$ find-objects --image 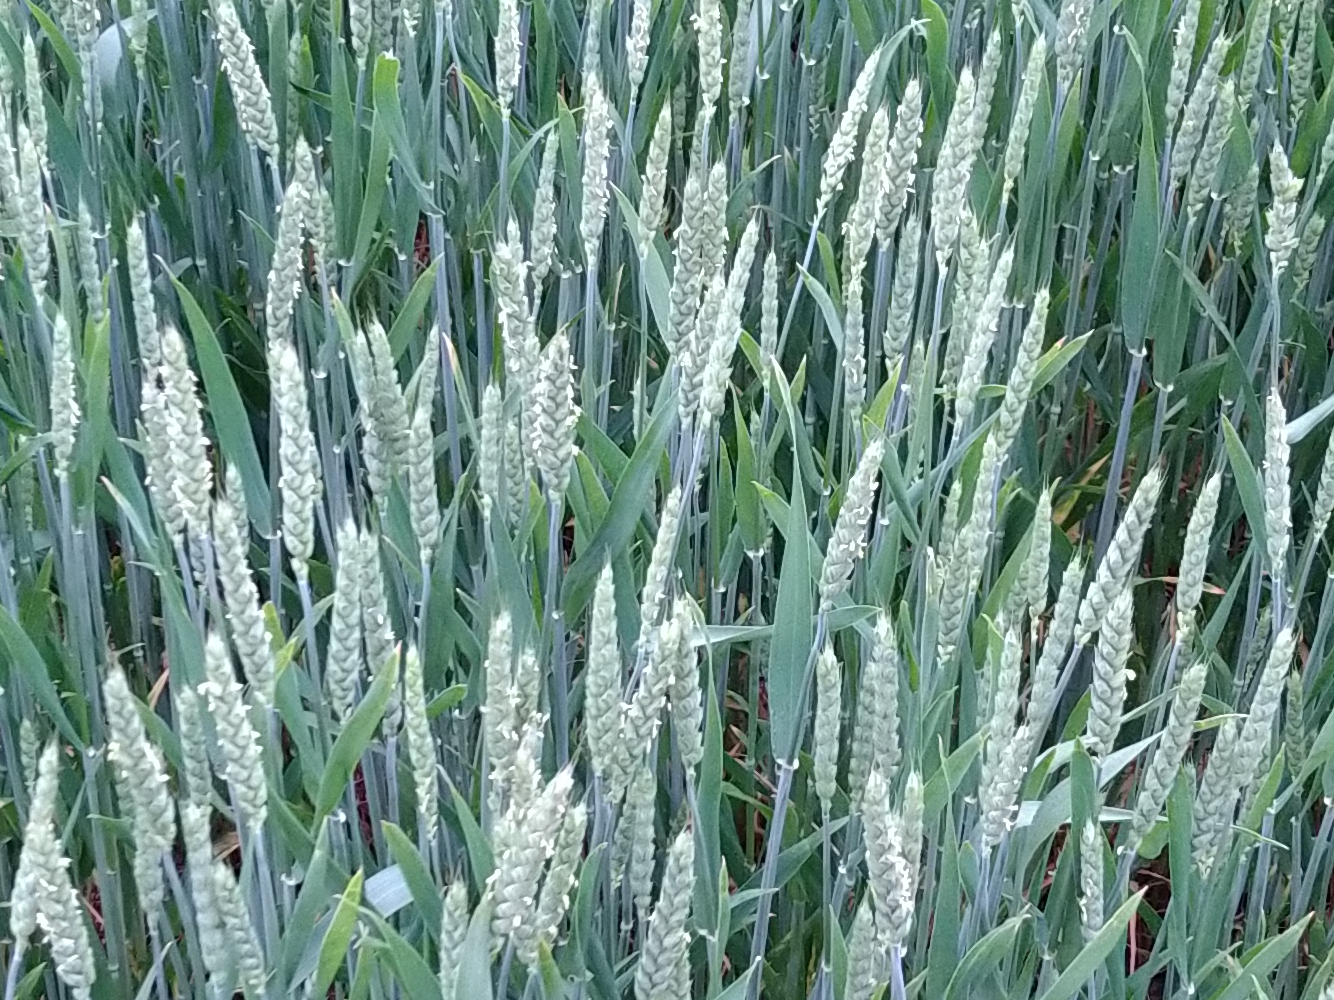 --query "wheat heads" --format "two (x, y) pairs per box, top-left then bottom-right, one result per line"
(1164, 0), (1204, 130)
(628, 0), (658, 87)
(286, 34), (300, 171)
(844, 280), (865, 420)
(968, 436), (999, 588)
(631, 770), (657, 907)
(1318, 41), (1334, 179)
(591, 749), (655, 801)
(961, 242), (992, 352)
(849, 111), (891, 262)
(1274, 0), (1303, 52)
(1292, 215), (1325, 296)
(18, 437), (35, 529)
(210, 0), (279, 163)
(819, 443), (884, 610)
(226, 465), (250, 555)
(543, 808), (589, 938)
(485, 613), (514, 779)
(1169, 40), (1229, 177)
(937, 530), (971, 660)
(1235, 749), (1288, 811)
(969, 32), (1003, 157)
(819, 50), (881, 200)
(956, 250), (1015, 409)
(982, 628), (1022, 794)
(729, 0), (754, 116)
(0, 75), (20, 211)
(327, 525), (362, 718)
(1285, 671), (1305, 779)
(24, 35), (49, 158)
(698, 0), (722, 104)
(997, 290), (1052, 456)
(111, 754), (136, 860)
(135, 800), (177, 910)
(847, 750), (899, 812)
(358, 406), (390, 511)
(1239, 0), (1275, 103)
(441, 883), (470, 1000)
(703, 164), (730, 286)
(1248, 610), (1272, 687)
(902, 775), (925, 889)
(178, 803), (226, 971)
(212, 863), (266, 990)
(493, 222), (538, 390)
(580, 77), (610, 255)
(294, 135), (322, 239)
(1081, 820), (1104, 943)
(20, 719), (39, 793)
(875, 625), (901, 786)
(815, 650), (841, 800)
(608, 775), (641, 889)
(1003, 37), (1048, 192)
(1265, 390), (1292, 564)
(1187, 82), (1236, 212)
(846, 903), (877, 1000)
(359, 533), (393, 678)
(841, 204), (856, 319)
(1072, 474), (1163, 640)
(639, 488), (684, 652)
(131, 0), (147, 72)
(480, 387), (502, 508)
(510, 722), (546, 820)
(1175, 475), (1223, 636)
(977, 616), (1004, 735)
(213, 501), (277, 705)
(372, 0), (392, 61)
(420, 328), (439, 420)
(318, 188), (338, 285)
(999, 559), (1031, 630)
(1233, 629), (1297, 787)
(635, 832), (696, 1000)
(140, 381), (182, 537)
(126, 224), (161, 373)
(849, 663), (878, 809)
(678, 282), (725, 418)
(13, 742), (72, 941)
(162, 330), (213, 532)
(877, 80), (924, 237)
(79, 51), (98, 133)
(663, 939), (693, 1000)
(941, 287), (969, 399)
(538, 336), (576, 495)
(932, 165), (972, 249)
(637, 103), (671, 247)
(30, 826), (96, 994)
(492, 818), (543, 964)
(814, 749), (841, 811)
(980, 749), (1049, 847)
(1029, 493), (1052, 614)
(1075, 0), (1107, 68)
(18, 126), (50, 290)
(1123, 667), (1209, 851)
(608, 624), (681, 795)
(347, 0), (371, 62)
(267, 186), (305, 346)
(847, 977), (882, 1000)
(884, 218), (922, 359)
(103, 672), (178, 846)
(864, 773), (914, 965)
(1190, 719), (1238, 874)
(1089, 592), (1135, 754)
(1267, 143), (1301, 268)
(517, 651), (542, 723)
(315, 0), (334, 28)
(674, 613), (702, 766)
(1288, 0), (1319, 119)
(368, 322), (411, 468)
(935, 70), (972, 192)
(1226, 165), (1259, 247)
(63, 0), (99, 48)
(762, 250), (779, 381)
(203, 635), (268, 822)
(582, 0), (605, 94)
(51, 315), (75, 468)
(77, 200), (102, 313)
(408, 411), (434, 549)
(938, 480), (962, 565)
(177, 688), (211, 812)
(530, 132), (558, 282)
(402, 647), (440, 834)
(1026, 561), (1084, 743)
(351, 335), (386, 406)
(523, 338), (541, 474)
(276, 348), (316, 556)
(667, 178), (706, 354)
(0, 40), (14, 113)
(1053, 0), (1092, 55)
(957, 205), (981, 278)
(585, 560), (621, 771)
(190, 510), (210, 585)
(703, 219), (761, 411)
(908, 344), (926, 444)
(496, 0), (521, 104)
(1313, 419), (1334, 532)
(504, 422), (524, 529)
